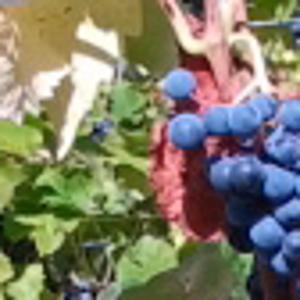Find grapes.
Segmentation results:
<instances>
[{
  "instance_id": "obj_1",
  "label": "grapes",
  "mask_w": 300,
  "mask_h": 300,
  "mask_svg": "<svg viewBox=\"0 0 300 300\" xmlns=\"http://www.w3.org/2000/svg\"><path fill=\"white\" fill-rule=\"evenodd\" d=\"M300 100L265 81L245 87L229 103L173 116L167 139L197 151L209 137L231 136L241 153L213 155L202 164L206 183L226 196L224 215L236 251L268 255L279 280L300 274Z\"/></svg>"
},
{
  "instance_id": "obj_2",
  "label": "grapes",
  "mask_w": 300,
  "mask_h": 300,
  "mask_svg": "<svg viewBox=\"0 0 300 300\" xmlns=\"http://www.w3.org/2000/svg\"><path fill=\"white\" fill-rule=\"evenodd\" d=\"M198 88L195 74L186 68H177L167 72L163 78L165 96L173 101L187 102L191 100Z\"/></svg>"
}]
</instances>
